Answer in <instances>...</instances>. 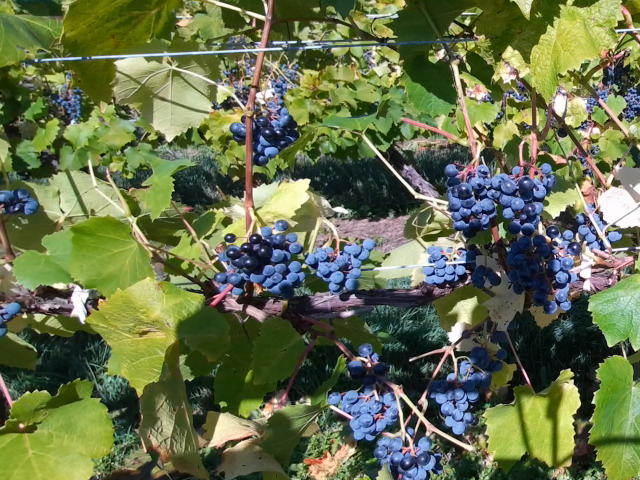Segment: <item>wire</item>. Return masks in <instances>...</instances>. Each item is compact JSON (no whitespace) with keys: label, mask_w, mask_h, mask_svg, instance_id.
Here are the masks:
<instances>
[{"label":"wire","mask_w":640,"mask_h":480,"mask_svg":"<svg viewBox=\"0 0 640 480\" xmlns=\"http://www.w3.org/2000/svg\"><path fill=\"white\" fill-rule=\"evenodd\" d=\"M471 37L456 38V39H436V40H386L376 41L373 43H331V44H317L316 46H264L254 48H238L229 50H211V51H194V52H154V53H141V54H106L102 56H53V57H40V58H25L21 60L22 64L28 63H42V62H55V61H105L109 59H135L140 60L143 58H156V57H197V56H216V55H231L240 53H257L266 51H326L334 48L351 49V50H370L378 46L388 45H421L431 46L438 44H458L471 42Z\"/></svg>","instance_id":"wire-1"},{"label":"wire","mask_w":640,"mask_h":480,"mask_svg":"<svg viewBox=\"0 0 640 480\" xmlns=\"http://www.w3.org/2000/svg\"><path fill=\"white\" fill-rule=\"evenodd\" d=\"M434 263H412V264H397L393 266H379L372 268H362V273H374L382 271H395L399 269H414V268H434Z\"/></svg>","instance_id":"wire-2"}]
</instances>
